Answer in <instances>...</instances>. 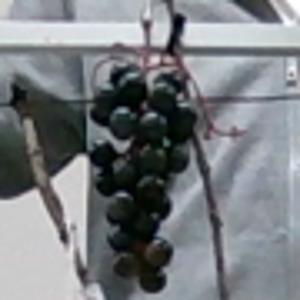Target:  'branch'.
<instances>
[{
	"instance_id": "branch-1",
	"label": "branch",
	"mask_w": 300,
	"mask_h": 300,
	"mask_svg": "<svg viewBox=\"0 0 300 300\" xmlns=\"http://www.w3.org/2000/svg\"><path fill=\"white\" fill-rule=\"evenodd\" d=\"M8 106L16 112V117L25 137L27 168L33 183L40 193V198L51 219L60 243L69 254L73 269L76 273L84 300H101L89 282L88 269L83 266L76 252L66 224L65 209L50 182V175L45 167L44 147L38 122L30 109L28 93L17 83H9Z\"/></svg>"
},
{
	"instance_id": "branch-3",
	"label": "branch",
	"mask_w": 300,
	"mask_h": 300,
	"mask_svg": "<svg viewBox=\"0 0 300 300\" xmlns=\"http://www.w3.org/2000/svg\"><path fill=\"white\" fill-rule=\"evenodd\" d=\"M171 33L166 41L165 52L173 59L176 65L175 74L178 75L182 84V101H192V95L188 82L193 80V75L187 70V67L183 63V48L182 38L185 34V26L188 23V17L178 11L170 13Z\"/></svg>"
},
{
	"instance_id": "branch-2",
	"label": "branch",
	"mask_w": 300,
	"mask_h": 300,
	"mask_svg": "<svg viewBox=\"0 0 300 300\" xmlns=\"http://www.w3.org/2000/svg\"><path fill=\"white\" fill-rule=\"evenodd\" d=\"M195 128V135L190 142L193 148L195 167L203 188V198L206 205L208 225L211 231L213 245L214 265L216 270V283L218 300H231L230 289L227 279L226 261L224 257V220L220 215L216 199L215 189L212 182L213 167L209 163L208 154Z\"/></svg>"
}]
</instances>
